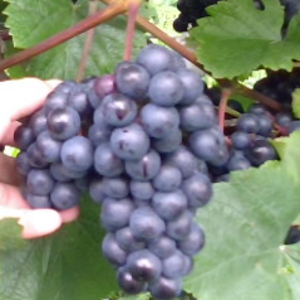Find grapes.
<instances>
[{
    "label": "grapes",
    "instance_id": "obj_1",
    "mask_svg": "<svg viewBox=\"0 0 300 300\" xmlns=\"http://www.w3.org/2000/svg\"><path fill=\"white\" fill-rule=\"evenodd\" d=\"M204 92L178 52L148 44L110 75L64 79L14 131L22 196L68 210L88 189L109 231L102 253L129 293L176 300L205 246L196 208L230 149Z\"/></svg>",
    "mask_w": 300,
    "mask_h": 300
}]
</instances>
